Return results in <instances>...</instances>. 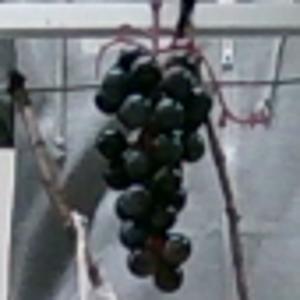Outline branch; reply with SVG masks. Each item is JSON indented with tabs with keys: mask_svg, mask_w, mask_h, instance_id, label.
<instances>
[{
	"mask_svg": "<svg viewBox=\"0 0 300 300\" xmlns=\"http://www.w3.org/2000/svg\"><path fill=\"white\" fill-rule=\"evenodd\" d=\"M199 0H178V16L175 23L170 50L178 48L179 40L186 42L185 53L196 61L200 68L199 57L195 50L196 29L192 17Z\"/></svg>",
	"mask_w": 300,
	"mask_h": 300,
	"instance_id": "170604dd",
	"label": "branch"
},
{
	"mask_svg": "<svg viewBox=\"0 0 300 300\" xmlns=\"http://www.w3.org/2000/svg\"><path fill=\"white\" fill-rule=\"evenodd\" d=\"M6 79L8 82L7 94L12 103L16 106V112L21 114L22 121L25 125L28 142L30 144L32 159L37 169L40 181L42 182L46 196L50 201V206L57 219L60 229L70 245L75 257L79 260L84 272L88 277L91 288L95 291L98 300H118L106 285L101 272L91 261L81 239L75 222L70 211L59 195L56 183L54 181L50 160L44 148L37 123L30 110L32 98L29 96L26 85L27 77L17 69H11L7 72Z\"/></svg>",
	"mask_w": 300,
	"mask_h": 300,
	"instance_id": "30e6481e",
	"label": "branch"
},
{
	"mask_svg": "<svg viewBox=\"0 0 300 300\" xmlns=\"http://www.w3.org/2000/svg\"><path fill=\"white\" fill-rule=\"evenodd\" d=\"M203 128L207 137L209 155L217 174L218 189L221 191L224 203L235 294L237 300H252L246 272L245 244L239 230V225L243 221L244 216L235 205L231 176L227 172V158L214 127L212 111L207 114V120Z\"/></svg>",
	"mask_w": 300,
	"mask_h": 300,
	"instance_id": "325d2c04",
	"label": "branch"
}]
</instances>
